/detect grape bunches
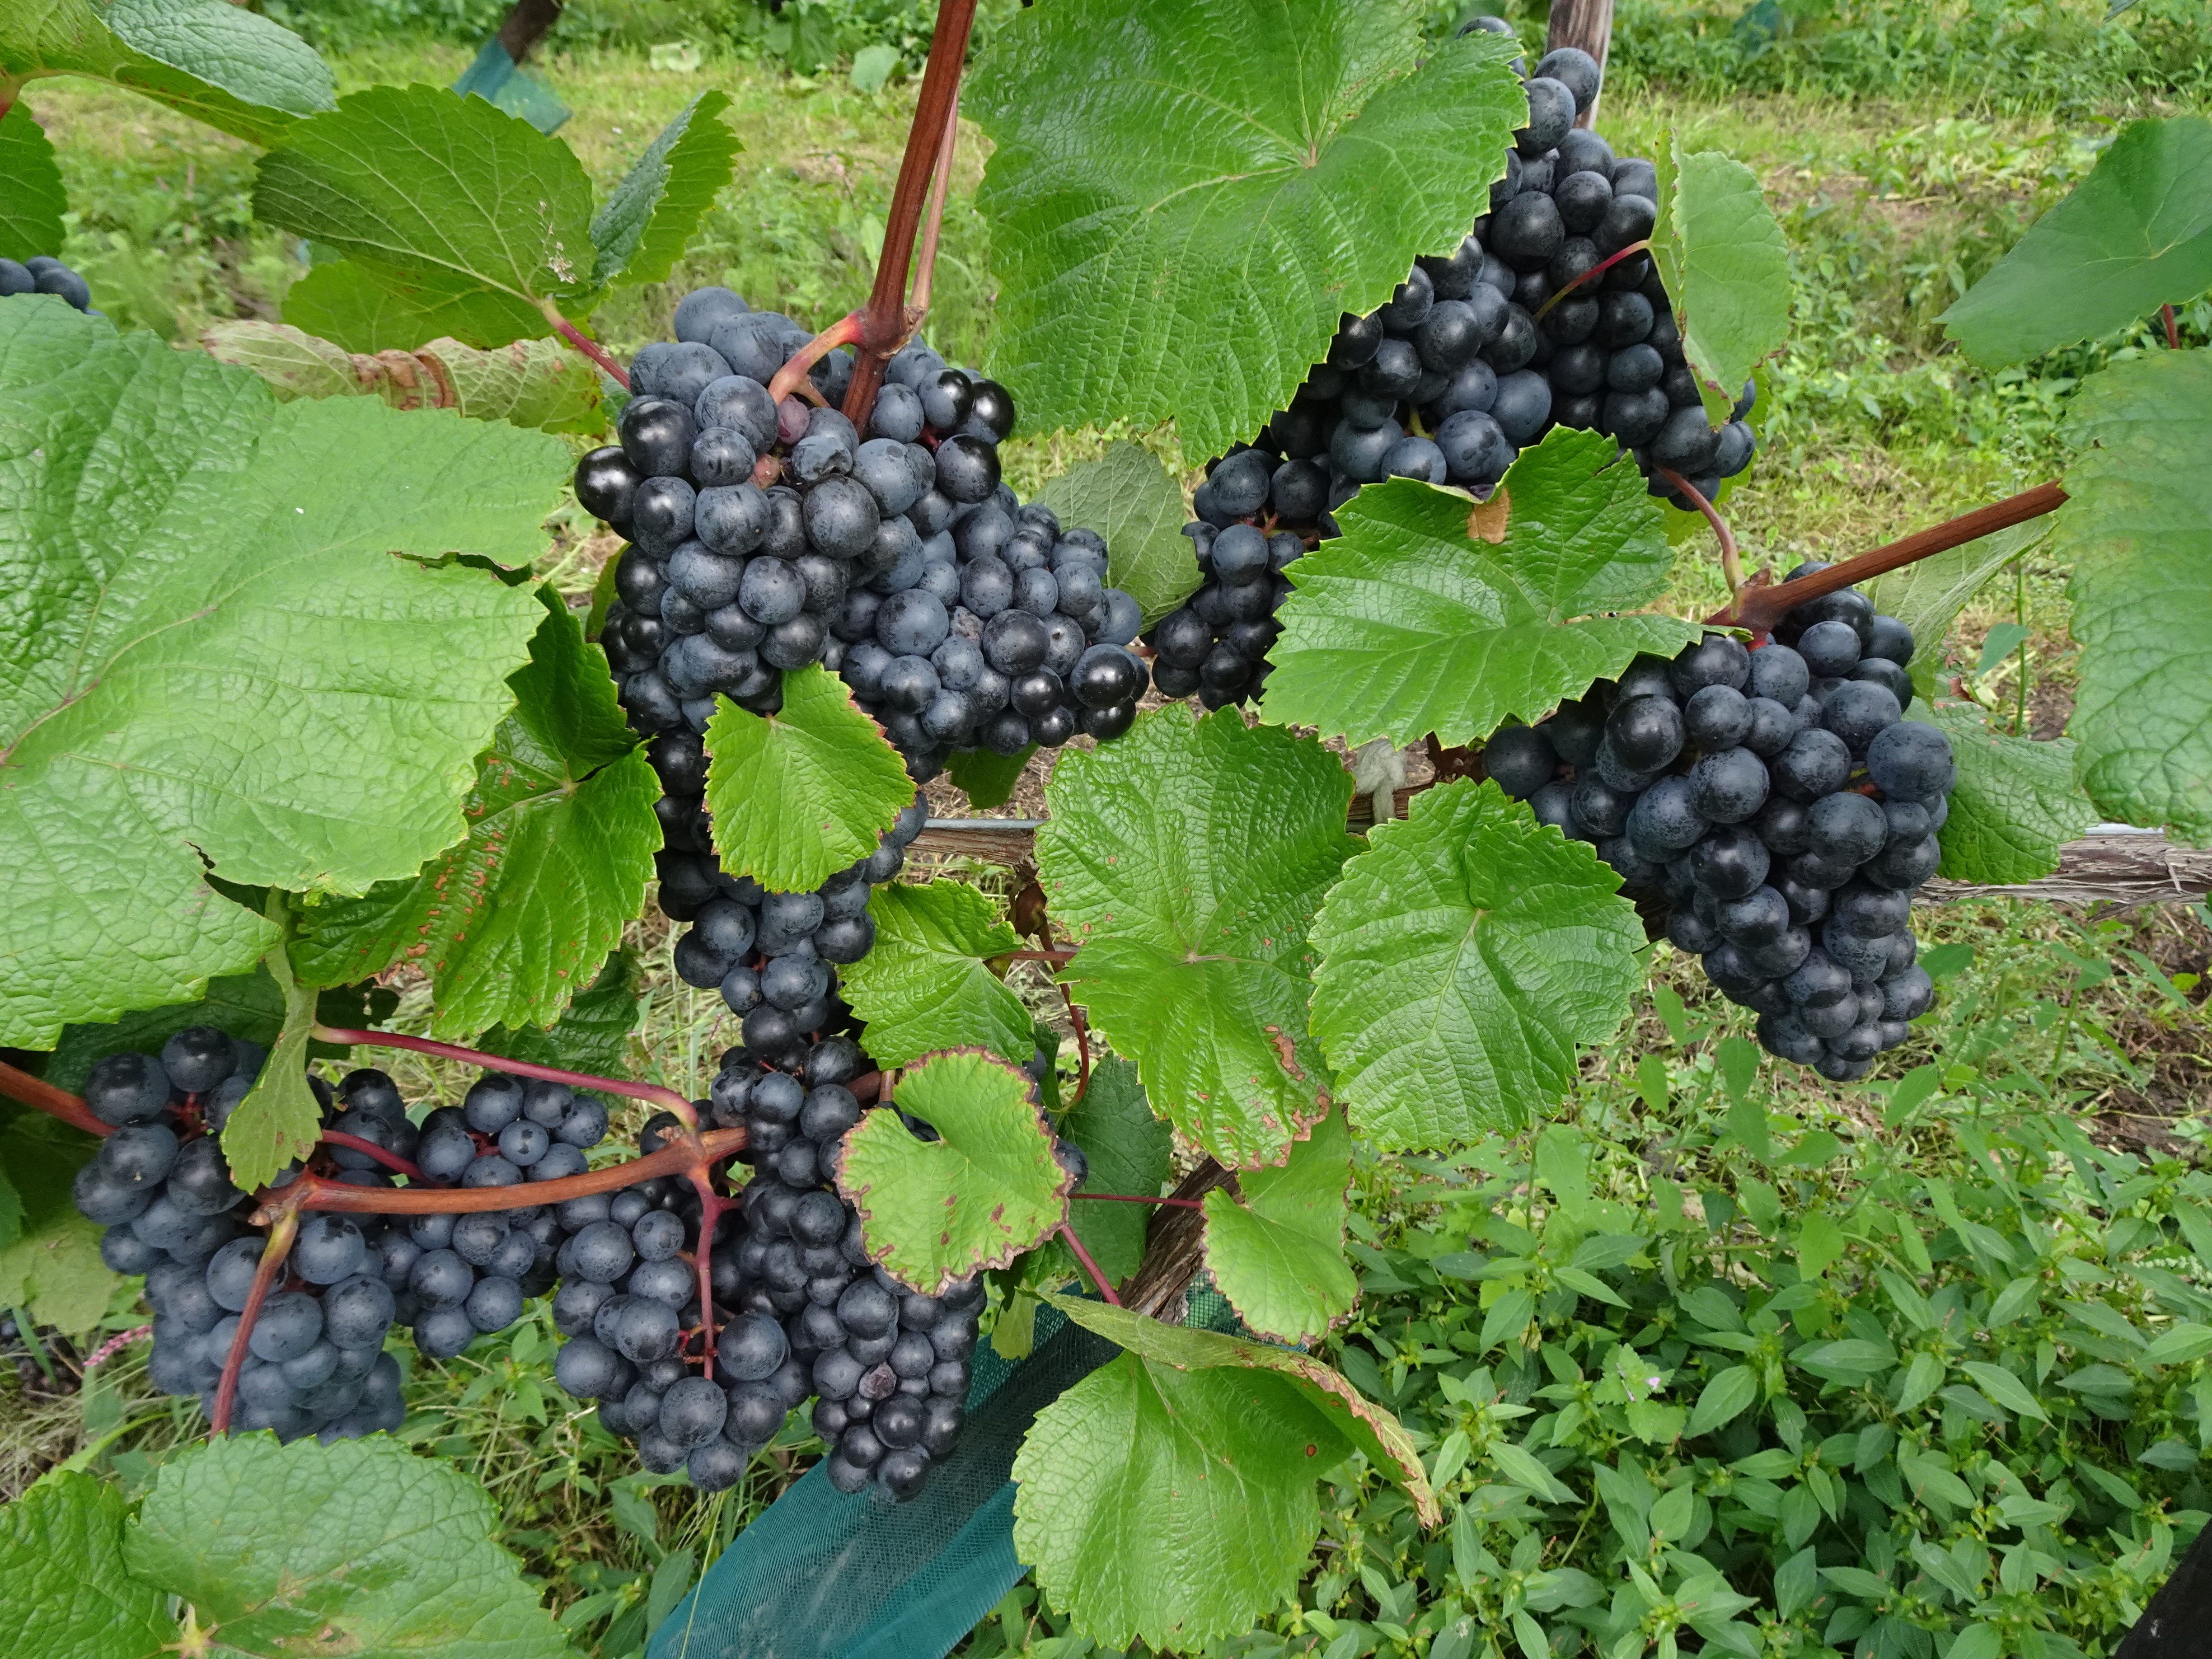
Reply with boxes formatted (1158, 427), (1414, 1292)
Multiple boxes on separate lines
(574, 285), (1016, 739)
(649, 726), (926, 1057)
(555, 1099), (813, 1492)
(71, 1026), (421, 1447)
(826, 482), (1150, 765)
(874, 1098), (939, 1141)
(0, 255), (108, 318)
(374, 1073), (609, 1358)
(1023, 1047), (1087, 1194)
(710, 1036), (864, 1156)
(1268, 233), (1551, 488)
(1138, 450), (1361, 710)
(1482, 560), (1954, 1079)
(1457, 16), (1755, 513)
(733, 1180), (988, 1503)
